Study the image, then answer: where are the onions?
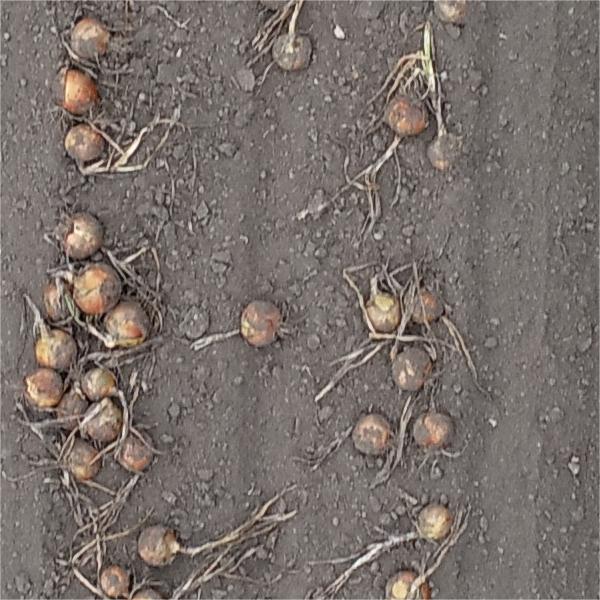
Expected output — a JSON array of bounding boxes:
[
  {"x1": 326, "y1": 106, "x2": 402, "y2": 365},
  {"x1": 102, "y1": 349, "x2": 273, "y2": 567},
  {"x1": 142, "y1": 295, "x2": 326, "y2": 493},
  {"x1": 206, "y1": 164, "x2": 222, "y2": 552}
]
[
  {"x1": 361, "y1": 289, "x2": 400, "y2": 332},
  {"x1": 41, "y1": 277, "x2": 72, "y2": 320},
  {"x1": 72, "y1": 264, "x2": 118, "y2": 311},
  {"x1": 63, "y1": 213, "x2": 101, "y2": 257},
  {"x1": 272, "y1": 32, "x2": 310, "y2": 71},
  {"x1": 80, "y1": 401, "x2": 121, "y2": 440},
  {"x1": 67, "y1": 17, "x2": 108, "y2": 59},
  {"x1": 64, "y1": 125, "x2": 103, "y2": 161},
  {"x1": 237, "y1": 300, "x2": 280, "y2": 346},
  {"x1": 81, "y1": 367, "x2": 113, "y2": 396},
  {"x1": 435, "y1": 0, "x2": 466, "y2": 27},
  {"x1": 101, "y1": 299, "x2": 148, "y2": 343},
  {"x1": 350, "y1": 414, "x2": 391, "y2": 455},
  {"x1": 412, "y1": 289, "x2": 443, "y2": 321},
  {"x1": 34, "y1": 331, "x2": 74, "y2": 369},
  {"x1": 414, "y1": 502, "x2": 450, "y2": 539},
  {"x1": 60, "y1": 70, "x2": 97, "y2": 111},
  {"x1": 390, "y1": 344, "x2": 432, "y2": 389},
  {"x1": 60, "y1": 395, "x2": 83, "y2": 418},
  {"x1": 63, "y1": 440, "x2": 101, "y2": 478},
  {"x1": 134, "y1": 587, "x2": 163, "y2": 600},
  {"x1": 387, "y1": 572, "x2": 416, "y2": 598},
  {"x1": 425, "y1": 142, "x2": 450, "y2": 171},
  {"x1": 138, "y1": 525, "x2": 179, "y2": 565},
  {"x1": 25, "y1": 370, "x2": 63, "y2": 407},
  {"x1": 384, "y1": 98, "x2": 425, "y2": 137},
  {"x1": 115, "y1": 428, "x2": 153, "y2": 471},
  {"x1": 413, "y1": 412, "x2": 457, "y2": 448},
  {"x1": 98, "y1": 563, "x2": 130, "y2": 594}
]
